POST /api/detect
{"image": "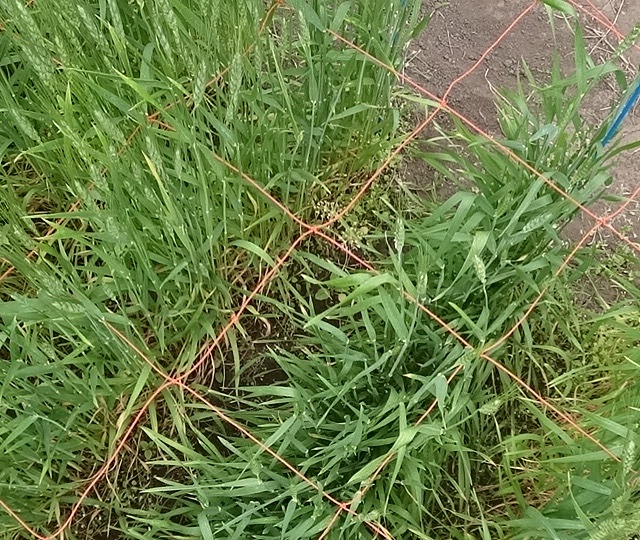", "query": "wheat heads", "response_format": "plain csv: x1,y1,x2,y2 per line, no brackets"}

206,0,222,26
479,400,506,414
123,181,138,200
250,458,262,475
102,282,118,301
416,273,426,295
362,510,379,520
144,23,176,59
105,219,122,240
94,110,123,143
79,9,113,51
145,138,163,176
172,151,186,181
457,348,482,364
13,224,30,245
557,100,573,134
523,212,549,232
223,94,238,122
55,300,85,315
39,271,61,292
572,155,590,185
91,164,106,190
252,42,260,74
622,440,634,477
154,0,178,41
278,18,292,51
144,188,154,203
468,254,484,281
76,184,97,214
234,2,248,27
393,217,404,248
11,108,46,141
17,3,45,47
106,144,118,167
57,13,82,49
296,11,310,47
189,64,208,105
227,51,241,91
16,41,47,83
109,0,127,43
46,34,70,67
592,518,625,539
286,483,299,501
